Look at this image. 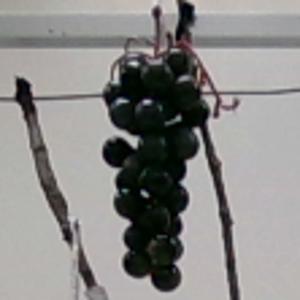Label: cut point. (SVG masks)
<instances>
[{"label": "cut point", "instance_id": "cut-point-1", "mask_svg": "<svg viewBox=\"0 0 300 300\" xmlns=\"http://www.w3.org/2000/svg\"><path fill=\"white\" fill-rule=\"evenodd\" d=\"M164 15L161 0H153L148 10V18L153 23L154 28V62L160 63V26Z\"/></svg>", "mask_w": 300, "mask_h": 300}]
</instances>
